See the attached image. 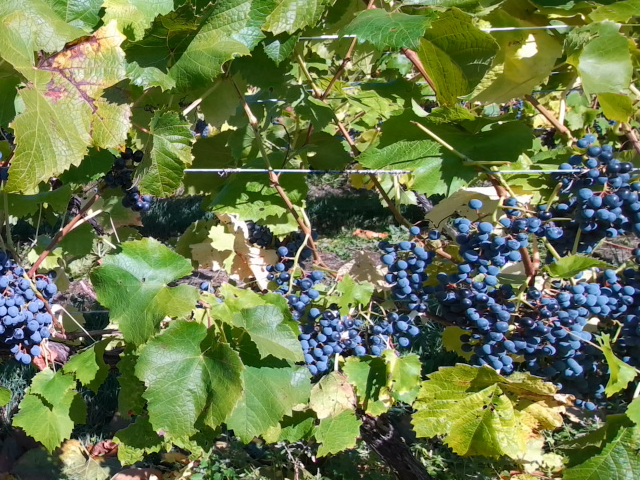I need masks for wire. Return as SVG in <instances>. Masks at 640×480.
<instances>
[{
    "mask_svg": "<svg viewBox=\"0 0 640 480\" xmlns=\"http://www.w3.org/2000/svg\"><path fill=\"white\" fill-rule=\"evenodd\" d=\"M244 172V173H256V174H283V173H337V174H358V175H370V174H395L396 176H405L411 173L409 166L396 167L395 169H339V168H281V169H258V168H246V167H199L192 166L184 169L185 173L190 172Z\"/></svg>",
    "mask_w": 640,
    "mask_h": 480,
    "instance_id": "obj_1",
    "label": "wire"
},
{
    "mask_svg": "<svg viewBox=\"0 0 640 480\" xmlns=\"http://www.w3.org/2000/svg\"><path fill=\"white\" fill-rule=\"evenodd\" d=\"M589 168H557V169H531V168H523L517 170H490V175H519V174H559V173H585L588 172Z\"/></svg>",
    "mask_w": 640,
    "mask_h": 480,
    "instance_id": "obj_2",
    "label": "wire"
},
{
    "mask_svg": "<svg viewBox=\"0 0 640 480\" xmlns=\"http://www.w3.org/2000/svg\"><path fill=\"white\" fill-rule=\"evenodd\" d=\"M578 22L572 23H560V24H550V25H513L507 27H482V32H509L515 30H552V29H562V28H574L578 27Z\"/></svg>",
    "mask_w": 640,
    "mask_h": 480,
    "instance_id": "obj_3",
    "label": "wire"
}]
</instances>
